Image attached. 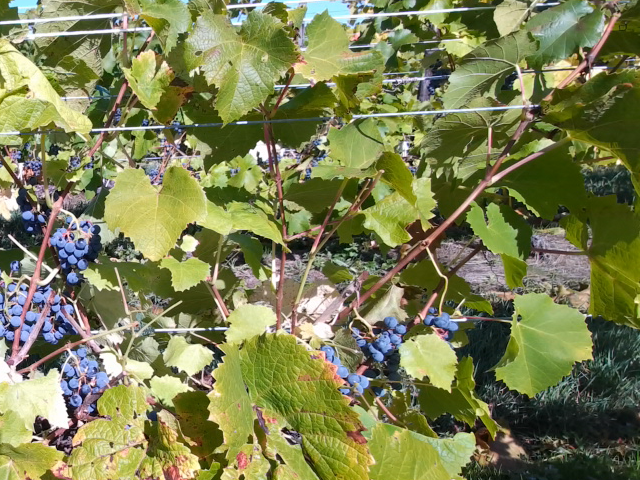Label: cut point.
<instances>
[{
	"label": "cut point",
	"instance_id": "7d7e1d6f",
	"mask_svg": "<svg viewBox=\"0 0 640 480\" xmlns=\"http://www.w3.org/2000/svg\"><path fill=\"white\" fill-rule=\"evenodd\" d=\"M353 312L357 315V317L351 319V323L356 322V320H360V322L367 324V320L362 318V315L359 313V311H357L356 306H353Z\"/></svg>",
	"mask_w": 640,
	"mask_h": 480
},
{
	"label": "cut point",
	"instance_id": "deb38ca7",
	"mask_svg": "<svg viewBox=\"0 0 640 480\" xmlns=\"http://www.w3.org/2000/svg\"><path fill=\"white\" fill-rule=\"evenodd\" d=\"M24 279H26L27 281L31 282L32 278L28 277L27 275H22L20 280H19V284H22V282L24 281Z\"/></svg>",
	"mask_w": 640,
	"mask_h": 480
},
{
	"label": "cut point",
	"instance_id": "6a23745f",
	"mask_svg": "<svg viewBox=\"0 0 640 480\" xmlns=\"http://www.w3.org/2000/svg\"><path fill=\"white\" fill-rule=\"evenodd\" d=\"M423 248H425V249L427 250L428 254L430 255V257H431V261H432V264H433V268L435 269V271H437V272L442 276L443 280L445 281V284H448V279H447L446 275L444 274V272H443L441 269H439V268L436 266V262H435V259H434V255H433V253H432V251H431L430 247H429V246H427V245H423Z\"/></svg>",
	"mask_w": 640,
	"mask_h": 480
}]
</instances>
